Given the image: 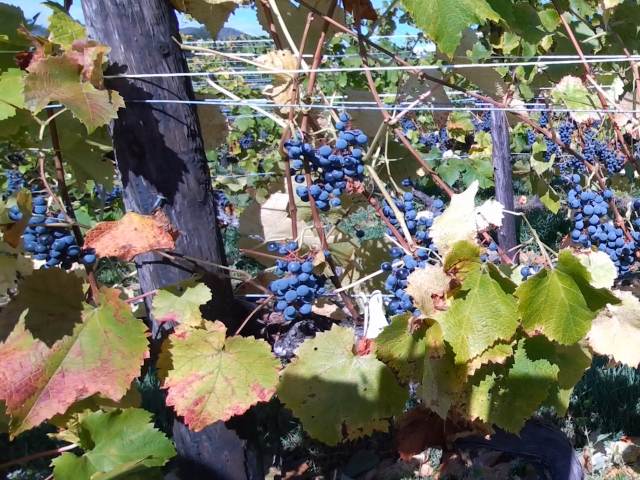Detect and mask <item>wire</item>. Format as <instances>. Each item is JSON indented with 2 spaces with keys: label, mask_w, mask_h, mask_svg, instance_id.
Masks as SVG:
<instances>
[{
  "label": "wire",
  "mask_w": 640,
  "mask_h": 480,
  "mask_svg": "<svg viewBox=\"0 0 640 480\" xmlns=\"http://www.w3.org/2000/svg\"><path fill=\"white\" fill-rule=\"evenodd\" d=\"M625 62H640V57H623L611 59H571V60H533L481 63H458L457 65H416V66H387V67H360L343 66L332 68H301L284 70H255V71H219V72H177V73H140V74H104V79H142V78H175L186 79L221 76H258V75H286L303 73H335L345 71L357 72H389V71H418V70H464L468 68L502 67L515 68L519 66L535 65H574V64H613Z\"/></svg>",
  "instance_id": "wire-1"
},
{
  "label": "wire",
  "mask_w": 640,
  "mask_h": 480,
  "mask_svg": "<svg viewBox=\"0 0 640 480\" xmlns=\"http://www.w3.org/2000/svg\"><path fill=\"white\" fill-rule=\"evenodd\" d=\"M126 103L136 104H154V105H197V106H234L244 107L251 109H266V110H299V109H342L353 111H386L393 113H455L461 114L465 112H511V113H554V114H594V115H609V114H629L632 116H640V111L631 109H612V110H596V109H556V108H513V107H429V108H395L388 106H355L344 104H297V105H268V104H253L246 102L236 101H222L219 99L209 101H199L191 99L180 100H156V99H138V98H126Z\"/></svg>",
  "instance_id": "wire-2"
}]
</instances>
